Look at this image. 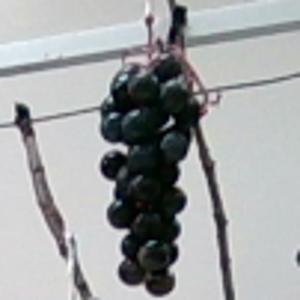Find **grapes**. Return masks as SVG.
<instances>
[{"label":"grapes","mask_w":300,"mask_h":300,"mask_svg":"<svg viewBox=\"0 0 300 300\" xmlns=\"http://www.w3.org/2000/svg\"><path fill=\"white\" fill-rule=\"evenodd\" d=\"M185 59L164 51L146 66L128 62L109 86L110 96L100 107V135L110 145L129 146L127 154L113 150L103 155L100 171L115 181V200L107 220L117 230L128 229L118 268L122 282L143 284L147 293L165 297L175 278L168 270L176 262L175 242L181 225L175 214L185 209L188 196L178 182L190 149V128L200 119L201 104L194 96Z\"/></svg>","instance_id":"grapes-1"}]
</instances>
